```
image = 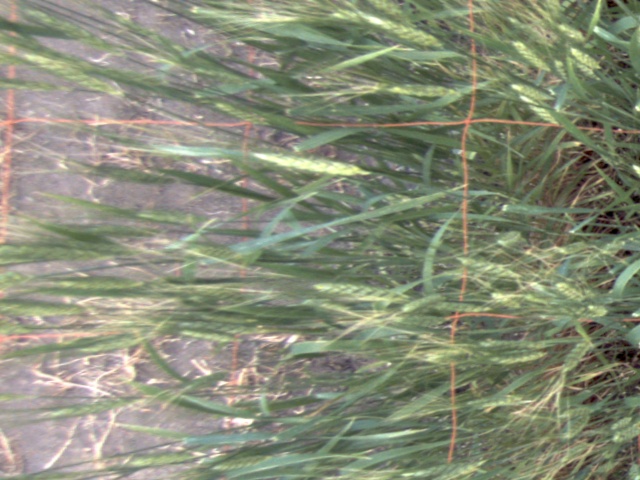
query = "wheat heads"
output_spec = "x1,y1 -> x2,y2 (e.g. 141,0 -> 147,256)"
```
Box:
27,10 -> 102,46
138,209 -> 196,225
192,285 -> 240,299
530,102 -> 558,126
393,82 -> 461,103
216,456 -> 265,472
0,323 -> 29,336
561,340 -> 592,373
116,421 -> 180,441
313,280 -> 407,304
39,395 -> 120,421
562,407 -> 590,418
128,452 -> 194,469
613,417 -> 631,429
433,300 -> 490,311
496,292 -> 523,311
559,242 -> 587,254
555,284 -> 592,304
190,247 -> 253,266
566,418 -> 589,439
514,80 -> 552,103
569,46 -> 599,70
453,253 -> 522,282
443,462 -> 482,480
100,163 -> 165,185
613,420 -> 640,443
557,22 -> 584,45
195,64 -> 249,86
0,269 -> 35,286
510,16 -> 540,35
471,397 -> 522,408
79,337 -> 140,355
204,312 -> 253,326
515,41 -> 548,74
27,50 -> 119,96
217,100 -> 266,128
186,371 -> 225,390
61,278 -> 143,290
181,331 -> 234,344
403,466 -> 448,479
398,313 -> 440,330
358,14 -> 440,49
405,294 -> 441,314
5,298 -> 91,319
257,149 -> 368,176
479,341 -> 536,348
3,247 -> 104,260
493,351 -> 545,365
